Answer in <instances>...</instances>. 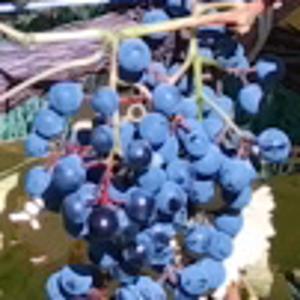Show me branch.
Wrapping results in <instances>:
<instances>
[{"label":"branch","instance_id":"obj_1","mask_svg":"<svg viewBox=\"0 0 300 300\" xmlns=\"http://www.w3.org/2000/svg\"><path fill=\"white\" fill-rule=\"evenodd\" d=\"M275 5V0H256L246 4L244 9H236L231 13H205L190 18H168L146 25H128L114 28H92L63 33L30 34L17 31L0 22V33L12 40L26 43H50L84 40L97 37H113L132 34L162 33L178 30L179 28L212 26L214 23L223 24L227 29L245 33L254 24V17L260 15Z\"/></svg>","mask_w":300,"mask_h":300}]
</instances>
